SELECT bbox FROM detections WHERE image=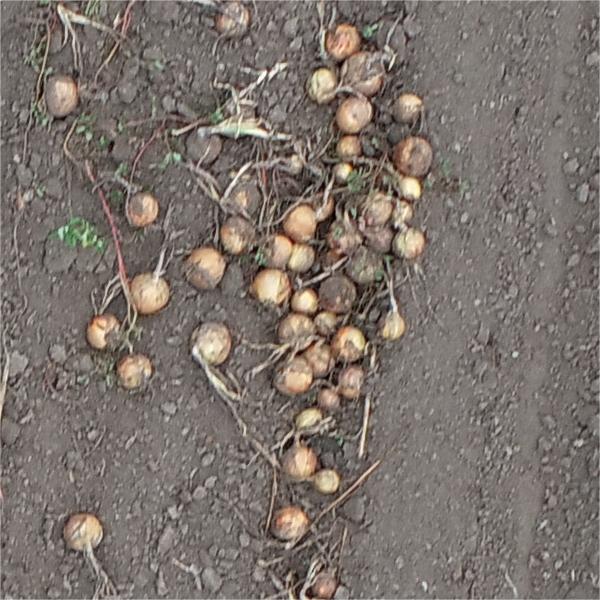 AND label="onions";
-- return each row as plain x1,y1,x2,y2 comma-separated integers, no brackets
377,307,405,340
85,312,115,346
209,0,248,34
331,324,368,362
264,236,293,267
335,369,362,397
290,287,318,313
312,194,333,219
397,176,421,197
284,443,317,477
346,249,381,283
305,566,337,596
334,95,373,130
113,353,152,388
391,202,414,227
228,180,261,217
189,130,220,165
332,163,359,186
183,245,225,288
293,407,328,435
357,224,393,252
44,75,79,115
275,359,312,394
392,91,421,121
190,324,229,365
305,65,338,100
391,226,424,258
317,276,354,315
316,389,340,409
275,312,314,346
342,50,385,92
251,267,292,304
122,190,159,225
324,23,360,58
60,513,102,549
128,272,168,312
311,469,338,495
335,133,361,158
219,216,255,254
331,220,363,253
286,242,315,271
362,190,395,224
391,136,431,175
299,342,331,376
271,503,307,541
314,310,338,335
283,204,316,239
